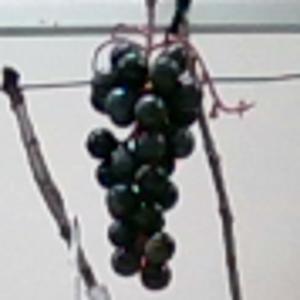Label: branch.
Returning a JSON list of instances; mask_svg holds the SVG:
<instances>
[{"label":"branch","mask_w":300,"mask_h":300,"mask_svg":"<svg viewBox=\"0 0 300 300\" xmlns=\"http://www.w3.org/2000/svg\"><path fill=\"white\" fill-rule=\"evenodd\" d=\"M189 73V76L194 78L197 82V85L202 89V83L200 81V77L198 75V66L196 65V57L194 55L193 63L186 69Z\"/></svg>","instance_id":"45aa463d"},{"label":"branch","mask_w":300,"mask_h":300,"mask_svg":"<svg viewBox=\"0 0 300 300\" xmlns=\"http://www.w3.org/2000/svg\"><path fill=\"white\" fill-rule=\"evenodd\" d=\"M200 110L198 125L202 135V150L207 164L212 171L215 192L218 194V210L220 226L222 227V240L225 245V260L228 270L229 290L231 300H243L240 286L239 258L235 243L236 217L230 211V197L227 195V184L222 176L221 157L217 154L215 142L209 128L205 101Z\"/></svg>","instance_id":"325d2c04"},{"label":"branch","mask_w":300,"mask_h":300,"mask_svg":"<svg viewBox=\"0 0 300 300\" xmlns=\"http://www.w3.org/2000/svg\"><path fill=\"white\" fill-rule=\"evenodd\" d=\"M195 5V0H172V14L168 25L164 29L166 41L178 37L184 45H189L190 26L189 15Z\"/></svg>","instance_id":"170604dd"},{"label":"branch","mask_w":300,"mask_h":300,"mask_svg":"<svg viewBox=\"0 0 300 300\" xmlns=\"http://www.w3.org/2000/svg\"><path fill=\"white\" fill-rule=\"evenodd\" d=\"M1 69L2 91H5L7 103L16 115L17 131L19 132L23 155L28 162L35 186L46 202L52 225L65 243L66 251L71 253L72 259L77 264L90 296L94 300H103L97 278L88 264L83 248L71 230L60 190L54 183L49 167L42 156L32 114L24 98L23 90L18 85L20 75L13 67L5 64Z\"/></svg>","instance_id":"30e6481e"}]
</instances>
